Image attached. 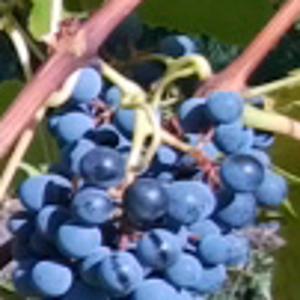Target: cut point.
<instances>
[{"label":"cut point","instance_id":"6a23745f","mask_svg":"<svg viewBox=\"0 0 300 300\" xmlns=\"http://www.w3.org/2000/svg\"><path fill=\"white\" fill-rule=\"evenodd\" d=\"M145 58L165 64L160 78L166 86L178 78H187L192 73L199 80L208 79L212 75L210 63L197 53H189L181 58H168L161 54L147 53Z\"/></svg>","mask_w":300,"mask_h":300},{"label":"cut point","instance_id":"7d7e1d6f","mask_svg":"<svg viewBox=\"0 0 300 300\" xmlns=\"http://www.w3.org/2000/svg\"><path fill=\"white\" fill-rule=\"evenodd\" d=\"M102 73V75L110 82L118 85L123 91V104L132 105L137 101H145L148 99V92L144 90L134 80L127 78L123 74L119 73L110 63L104 61L98 55L95 57V63Z\"/></svg>","mask_w":300,"mask_h":300}]
</instances>
